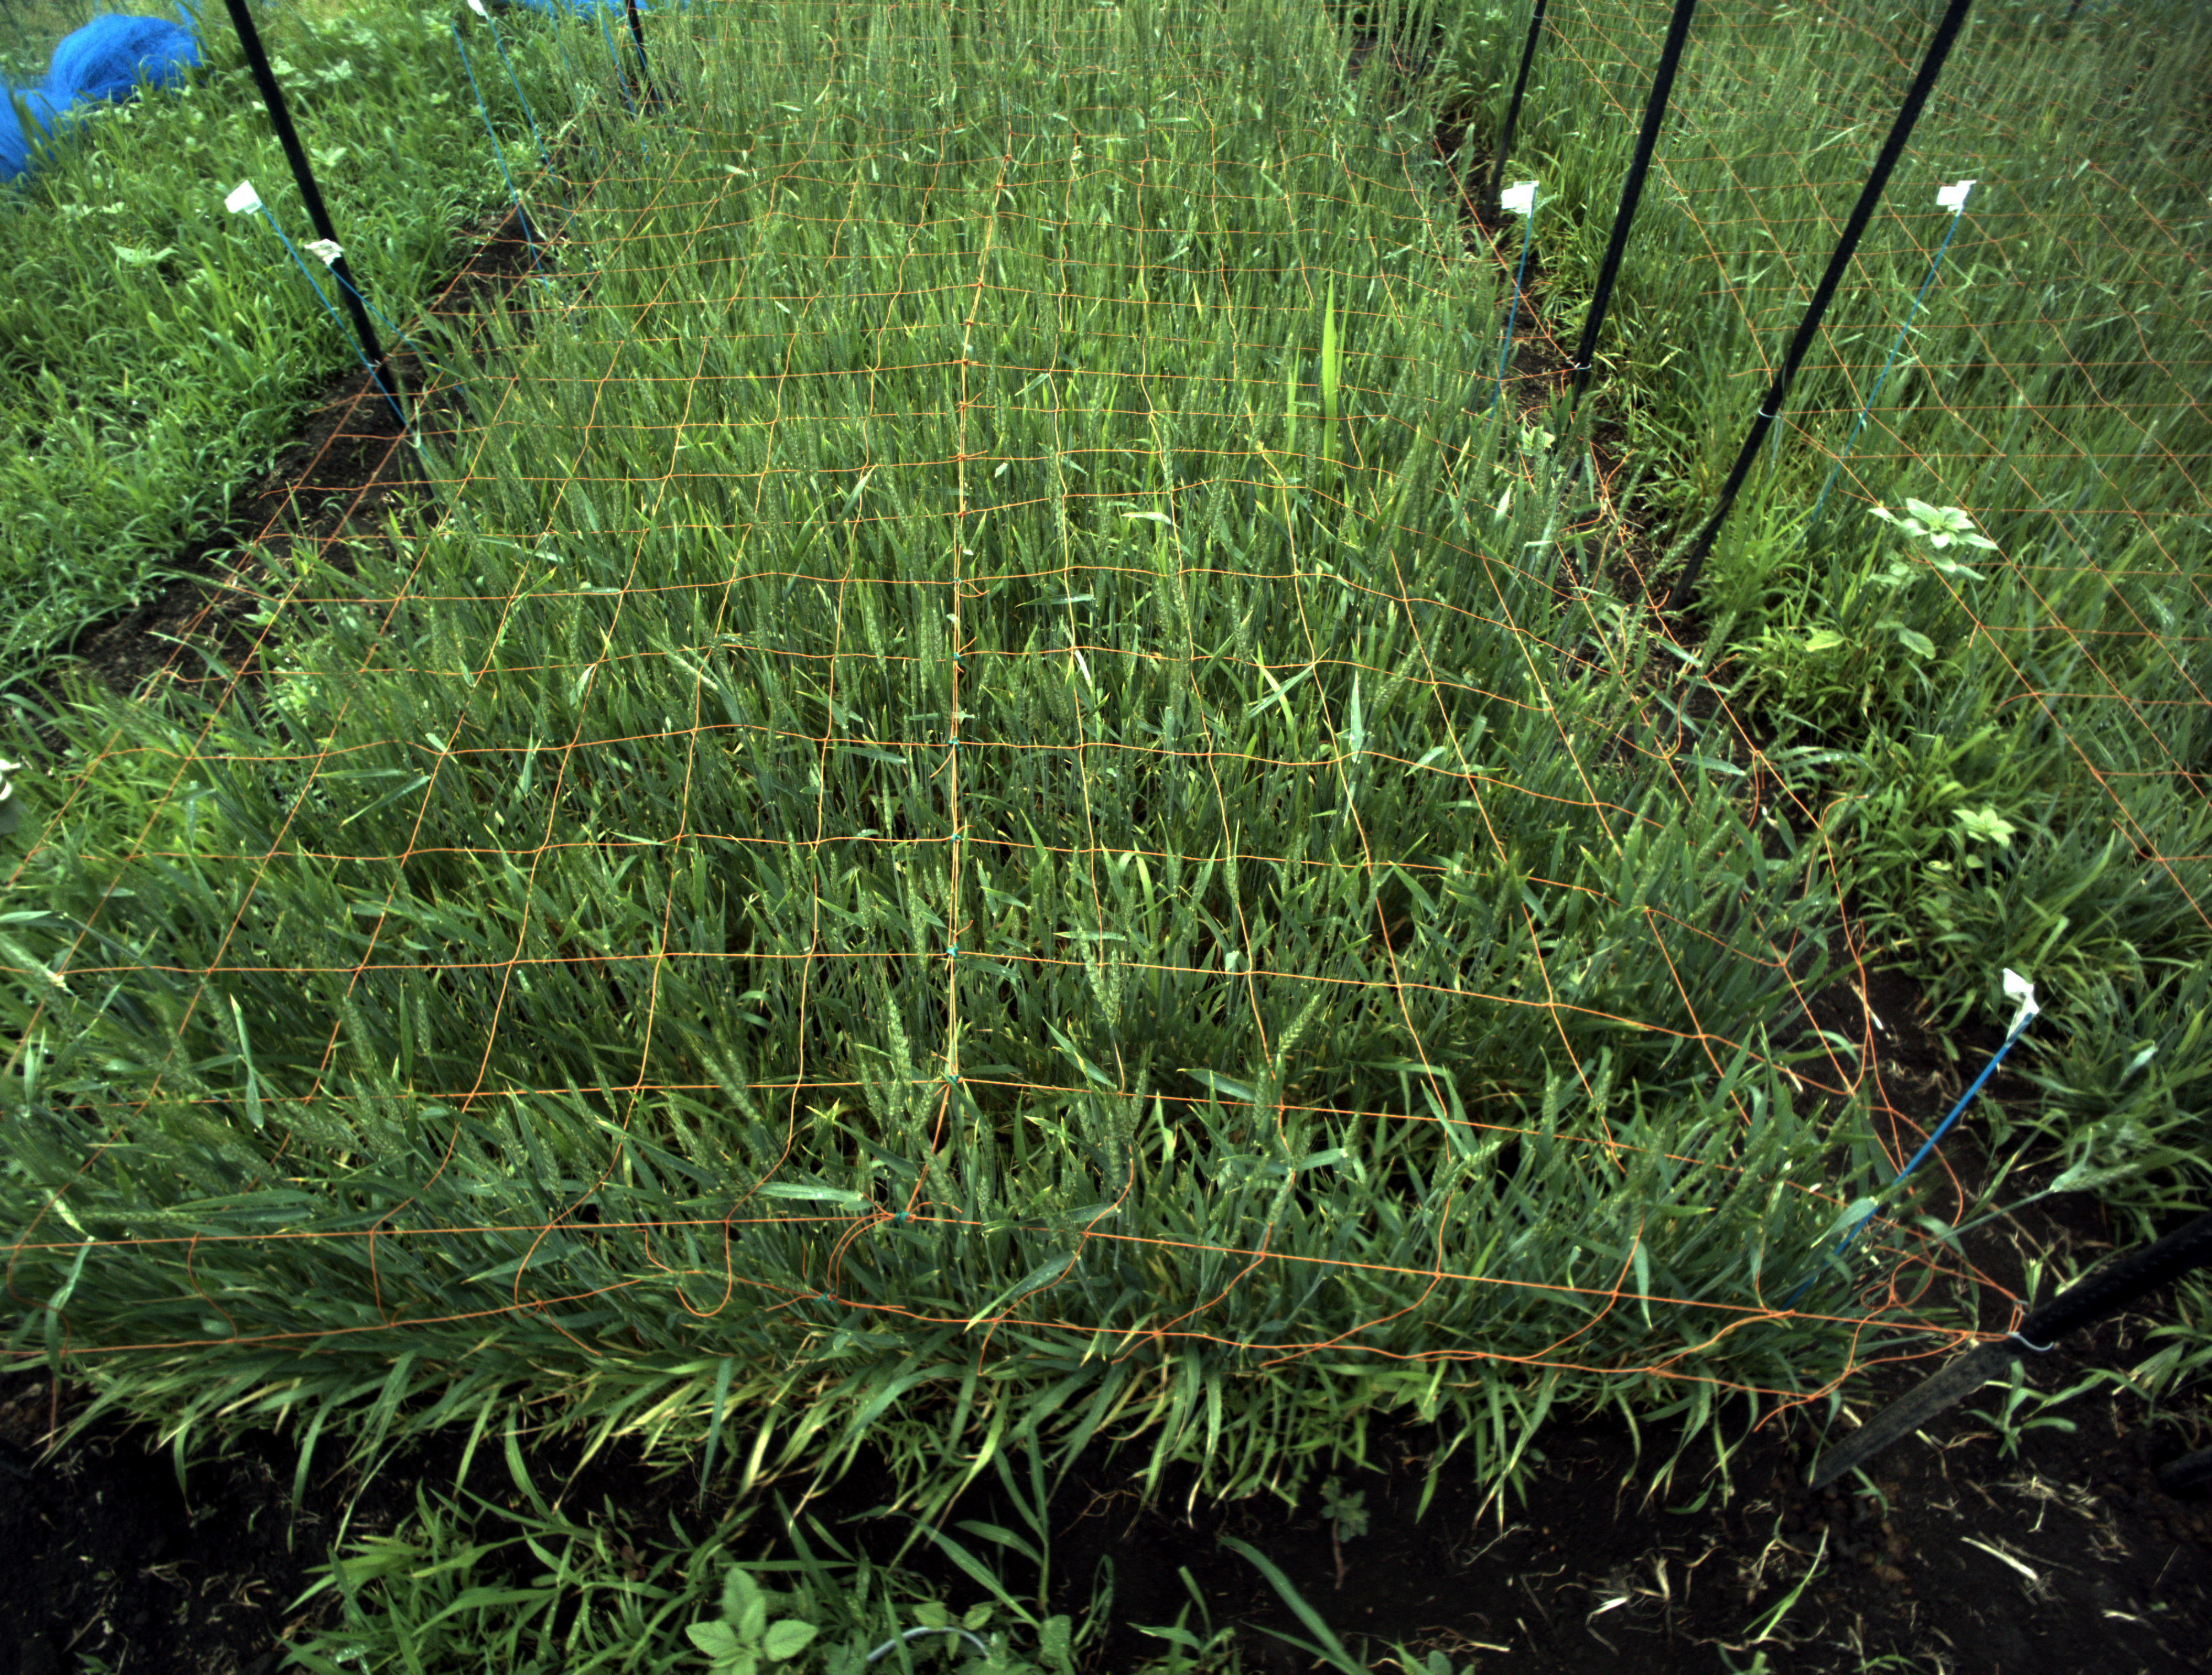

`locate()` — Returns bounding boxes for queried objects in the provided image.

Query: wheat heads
[602,410,612,446]
[1230,594,1251,663]
[1623,788,1654,850]
[1786,1123,1811,1155]
[1337,53,1349,86]
[983,1125,998,1155]
[577,656,590,687]
[1120,894,1126,916]
[860,890,870,930]
[1179,185,1184,216]
[1239,217,1251,254]
[562,656,576,687]
[697,478,704,501]
[939,28,947,64]
[391,698,415,740]
[977,66,994,114]
[681,865,695,907]
[818,332,830,372]
[776,531,785,563]
[342,993,379,1069]
[892,7,898,32]
[829,295,838,335]
[1365,2,1374,37]
[1028,434,1037,483]
[825,133,832,160]
[833,160,844,182]
[779,864,795,909]
[1267,1172,1295,1225]
[1275,639,1281,658]
[1971,48,1987,80]
[904,64,914,98]
[1234,417,1245,460]
[1048,443,1056,512]
[526,431,548,463]
[809,37,816,71]
[784,1267,805,1286]
[1087,747,1096,773]
[1768,840,1814,885]
[1377,15,1385,52]
[905,21,912,48]
[310,646,377,720]
[1418,516,1434,566]
[1156,521,1166,551]
[289,532,311,555]
[920,2,928,45]
[1401,386,1415,422]
[1029,640,1041,679]
[742,693,757,734]
[1019,1,1024,31]
[683,336,695,364]
[693,272,705,295]
[922,409,931,445]
[1153,578,1171,646]
[998,391,1007,432]
[1488,421,1504,465]
[854,1171,866,1194]
[894,551,902,586]
[1083,283,1093,316]
[540,686,552,724]
[1087,890,1102,924]
[768,89,778,121]
[496,563,511,585]
[1873,138,1882,161]
[198,974,240,1043]
[878,48,885,87]
[1186,210,1194,237]
[1226,1228,1241,1251]
[1467,749,1479,770]
[964,226,970,253]
[924,463,933,485]
[1058,233,1065,260]
[1251,546,1259,573]
[1951,31,1964,62]
[993,391,1000,429]
[927,441,936,463]
[1233,619,1252,665]
[795,678,804,721]
[924,1179,944,1214]
[1699,850,1734,889]
[1315,500,1321,520]
[568,486,579,530]
[1027,697,1035,739]
[612,482,622,536]
[218,1143,276,1179]
[1128,185,1138,209]
[875,148,889,179]
[352,1078,379,1123]
[699,618,729,661]
[284,1099,365,1155]
[1179,635,1190,690]
[909,661,918,708]
[1894,1188,1930,1215]
[671,10,681,35]
[493,721,507,745]
[592,487,606,542]
[1297,32,1307,57]
[1383,2,1393,56]
[1264,358,1276,371]
[636,576,659,612]
[1232,383,1251,426]
[1277,994,1320,1054]
[1419,23,1432,59]
[1038,353,1047,370]
[880,782,894,834]
[778,75,784,98]
[1126,1068,1148,1136]
[1103,946,1124,1030]
[1258,516,1269,557]
[711,75,718,121]
[373,1079,406,1134]
[1076,924,1107,1008]
[1060,1210,1082,1253]
[826,762,834,791]
[1686,882,1729,921]
[720,197,737,229]
[1179,1,1183,24]
[666,39,677,69]
[1040,6,1047,34]
[760,78,770,110]
[975,331,985,370]
[772,221,785,237]
[649,862,663,891]
[882,325,888,350]
[816,249,826,277]
[792,425,801,456]
[905,191,913,213]
[992,200,999,225]
[667,272,683,301]
[842,16,851,55]
[590,925,605,941]
[522,191,541,227]
[1407,267,1415,301]
[1284,2,1289,16]
[764,230,777,260]
[935,864,958,917]
[97,686,171,740]
[1388,223,1396,250]
[1440,862,1455,907]
[907,162,915,197]
[1373,210,1381,236]
[1416,97,1427,134]
[1015,319,1025,362]
[1377,785,1398,830]
[597,24,614,62]
[1261,8,1272,53]
[110,1107,187,1155]
[193,1115,240,1143]
[841,273,850,320]
[1428,620,1444,661]
[1116,52,1129,87]
[663,43,674,71]
[1346,264,1353,290]
[762,299,777,341]
[1128,132,1146,167]
[954,327,973,362]
[1377,83,1386,101]
[1070,843,1080,888]
[928,622,938,671]
[1404,16,1416,58]
[947,323,956,349]
[218,827,236,865]
[1536,527,1563,586]
[1280,853,1292,896]
[443,902,460,922]
[1214,225,1223,256]
[1235,365,1244,381]
[1389,448,1414,497]
[1034,271,1046,314]
[1441,331,1453,361]
[1630,1197,1644,1240]
[591,881,626,925]
[491,455,539,513]
[1373,271,1385,299]
[1502,519,1520,559]
[1465,1140,1502,1170]
[1199,354,1216,415]
[1481,273,1492,326]
[1773,58,1788,91]
[671,30,683,72]
[1135,536,1143,565]
[1084,861,1091,880]
[1646,814,1677,872]
[1191,704,1202,734]
[1736,1153,1765,1193]
[920,521,926,544]
[590,557,604,584]
[1714,610,1737,655]
[1130,343,1137,372]
[765,159,775,192]
[450,334,475,380]
[875,4,883,46]
[1233,316,1247,353]
[982,547,989,585]
[866,287,879,307]
[1718,1194,1737,1222]
[901,713,910,756]
[1599,681,1614,713]
[1184,75,1194,111]
[417,353,447,399]
[1124,319,1129,342]
[678,336,688,373]
[1150,6,1159,28]
[676,255,696,295]
[1318,1241,1329,1265]
[630,1117,651,1142]
[985,348,997,406]
[1491,301,1507,339]
[1270,541,1282,579]
[1838,1161,1874,1185]
[1342,1146,1358,1177]
[1141,24,1148,61]
[1097,246,1102,268]
[1047,20,1053,54]
[745,294,757,342]
[1346,127,1353,160]
[384,921,406,944]
[813,1114,820,1137]
[1326,859,1339,901]
[2029,56,2050,95]
[166,685,201,729]
[1541,1074,1561,1120]
[733,553,744,588]
[175,569,229,589]
[609,549,621,586]
[1217,311,1226,348]
[871,335,877,364]
[671,853,685,905]
[2140,421,2159,448]
[1357,270,1369,294]
[851,436,860,467]
[578,932,616,962]
[917,288,926,310]
[781,549,799,566]
[1092,174,1099,199]
[688,717,713,760]
[126,1042,214,1099]
[530,314,542,342]
[558,383,575,426]
[1030,767,1037,786]
[1408,706,1423,742]
[1162,314,1169,345]
[1182,153,1192,185]
[1120,451,1127,480]
[887,483,916,543]
[966,8,972,33]
[1184,1,1191,12]
[561,672,573,712]
[1004,1169,1022,1211]
[1094,450,1099,473]
[591,1060,618,1116]
[1015,36,1021,58]
[1856,95,1869,122]
[1328,24,1338,58]
[1076,1100,1100,1149]
[1180,923,1193,952]
[672,654,719,693]
[701,1056,765,1126]
[786,830,800,886]
[766,716,777,769]
[1080,314,1088,345]
[793,892,816,928]
[1121,634,1131,683]
[1200,23,1206,64]
[1005,1,1015,20]
[710,1208,737,1229]
[1233,35,1246,73]
[899,226,906,253]
[1163,423,1174,496]
[644,136,664,167]
[682,527,693,561]
[1441,1154,1458,1181]
[1183,31,1187,52]
[1693,792,1710,836]
[1177,394,1188,428]
[769,71,778,90]
[495,1117,529,1167]
[1073,240,1079,265]
[561,1120,611,1170]
[442,686,458,719]
[756,163,766,192]
[780,1279,810,1293]
[1348,676,1363,727]
[1108,746,1118,772]
[833,743,844,775]
[1000,219,1008,238]
[271,893,314,928]
[627,330,641,358]
[506,884,519,910]
[1015,771,1022,801]
[1359,675,1375,710]
[1203,474,1222,535]
[801,20,810,74]
[618,185,629,216]
[355,857,372,880]
[1381,361,1412,436]
[482,916,501,957]
[1311,41,1319,78]
[936,683,956,728]
[1104,451,1111,470]
[1066,93,1075,129]
[882,172,892,192]
[1578,738,1603,767]
[408,904,433,936]
[1370,957,1386,987]
[1073,532,1096,569]
[920,615,930,696]
[1674,1159,1716,1192]
[1406,791,1418,817]
[1266,736,1274,766]
[740,445,748,473]
[849,64,853,90]
[1104,12,1115,48]
[1065,152,1072,176]
[799,344,806,362]
[715,342,726,369]
[495,470,515,521]
[718,660,743,708]
[910,1082,936,1131]
[1084,70,1097,126]
[995,900,1005,920]
[959,747,965,776]
[731,484,771,547]
[563,76,575,112]
[4,943,83,1040]
[1425,450,1441,505]
[841,429,852,459]
[682,33,687,65]
[1239,200,1248,231]
[751,437,764,468]
[1038,1113,1051,1141]
[987,307,995,344]
[1311,869,1327,909]
[1679,65,1690,101]
[1442,374,1457,431]
[1144,201,1149,229]
[1054,478,1066,549]
[1189,215,1200,246]
[1032,528,1042,573]
[1747,738,1783,772]
[295,884,323,919]
[965,49,976,106]
[1251,1069,1271,1132]
[1656,515,1711,573]
[384,521,409,560]
[1373,518,1399,566]
[1112,180,1119,219]
[1240,1096,1252,1136]
[1367,317,1393,386]
[1795,146,1811,180]
[454,1124,489,1173]
[164,1025,196,1065]
[1050,673,1074,726]
[1168,283,1179,325]
[527,887,544,913]
[1114,261,1125,303]
[540,1135,565,1203]
[1187,319,1195,350]
[1437,299,1445,324]
[2085,254,2092,271]
[1451,15,1465,52]
[761,891,778,931]
[1516,513,1532,559]
[824,215,832,243]
[1040,1207,1064,1246]
[1004,434,1012,463]
[1105,881,1115,904]
[1619,463,1646,515]
[1074,340,1080,359]
[451,610,466,652]
[1486,338,1495,376]
[1259,303,1268,343]
[1407,669,1421,707]
[1278,332,1296,393]
[1145,333,1152,370]
[1291,218,1301,250]
[1724,663,1756,700]
[1339,10,1352,54]
[173,1149,233,1194]
[1354,79,1369,118]
[1626,596,1645,651]
[1298,682,1304,701]
[1136,321,1148,364]
[1142,529,1148,563]
[414,994,435,1056]
[1624,1154,1640,1184]
[1290,109,1299,146]
[1212,488,1228,544]
[976,1175,990,1213]
[1284,541,1298,573]
[860,1061,884,1122]
[808,247,832,302]
[635,1240,658,1265]
[866,603,888,674]
[1725,254,1736,278]
[421,702,435,730]
[962,906,971,945]
[1111,424,1117,440]
[2041,237,2054,270]
[898,1118,923,1151]
[1447,732,1467,765]
[870,707,879,739]
[1965,10,1976,47]
[878,525,885,565]
[574,1148,594,1191]
[1324,230,1341,265]
[601,117,622,150]
[767,480,778,542]
[1123,343,1129,376]
[647,63,667,99]
[1025,533,1036,573]
[930,573,938,609]
[1476,453,1491,509]
[780,421,813,481]
[606,16,624,62]
[575,33,592,72]
[866,92,878,144]
[1590,1127,1611,1144]
[1438,223,1452,258]
[2039,83,2056,117]
[851,661,863,706]
[642,265,656,288]
[577,111,588,137]
[1036,698,1046,735]
[1127,753,1137,784]
[1071,296,1077,320]
[975,438,984,466]
[1421,221,1427,255]
[827,336,839,367]
[996,309,1004,339]
[1271,95,1279,151]
[901,401,909,437]
[857,174,872,210]
[665,582,690,620]
[550,422,566,463]
[1010,78,1017,107]
[1135,703,1145,747]
[731,1156,755,1191]
[1013,672,1025,720]
[914,521,928,574]
[1266,229,1277,263]
[1073,1,1078,16]
[1079,32,1087,68]
[1468,1197,1479,1223]
[1080,115,1093,150]
[1075,17,1085,35]
[764,270,771,292]
[1281,433,1289,468]
[584,36,600,72]
[621,419,641,453]
[778,514,792,540]
[1101,211,1107,232]
[1402,427,1412,451]
[787,910,800,943]
[1275,498,1284,516]
[1744,1117,1776,1158]
[679,1123,709,1168]
[906,877,922,931]
[1154,185,1167,216]
[647,876,662,915]
[765,432,773,451]
[398,376,412,424]
[656,163,673,199]
[778,17,796,59]
[1030,893,1038,915]
[1269,16,1279,61]
[724,1046,751,1099]
[1368,859,1380,892]
[1827,1092,1860,1139]
[653,659,669,703]
[474,548,496,597]
[1240,61,1252,97]
[863,411,875,446]
[933,1,946,27]
[1559,937,1576,966]
[1038,318,1047,351]
[513,615,523,639]
[431,884,448,914]
[1349,269,1358,310]
[1425,257,1441,296]
[1434,359,1444,397]
[685,38,698,77]
[466,687,491,725]
[567,871,583,904]
[1033,248,1038,272]
[1419,453,1430,512]
[1022,424,1032,478]
[834,658,846,689]
[1260,97,1273,142]
[865,45,872,78]
[630,645,651,689]
[566,1075,601,1130]
[929,1230,942,1251]
[597,667,620,708]
[1130,702,1140,740]
[999,263,1008,285]
[609,65,619,102]
[1060,1166,1069,1194]
[1236,703,1249,740]
[1353,468,1362,494]
[885,994,915,1089]
[46,1187,80,1230]
[976,654,996,702]
[1424,542,1443,581]
[467,877,486,910]
[955,250,964,293]
[607,502,615,526]
[937,188,946,214]
[266,1112,306,1139]
[1168,680,1181,719]
[1525,1226,1544,1244]
[1193,538,1200,569]
[1168,127,1179,172]
[747,1195,765,1229]
[1022,218,1031,234]
[815,13,822,41]
[716,293,726,341]
[793,3,803,52]
[1041,71,1049,99]
[917,64,924,99]
[1325,916,1337,948]
[1015,660,1023,678]
[1028,864,1036,892]
[627,47,637,69]
[953,510,968,550]
[1686,791,1701,829]
[1231,284,1241,331]
[1190,865,1204,909]
[1144,22,1156,60]
[1006,304,1016,322]
[821,926,835,952]
[632,368,661,417]
[1871,1173,1921,1204]
[430,688,444,726]
[1114,537,1127,578]
[473,295,508,347]
[493,293,517,340]
[1249,919,1261,947]
[1372,677,1397,711]
[946,87,954,122]
[1116,12,1129,52]
[799,314,810,348]
[1532,428,1547,497]
[1113,1101,1130,1147]
[443,490,474,539]
[683,78,693,96]
[1024,325,1034,368]
[466,354,485,380]
[1153,335,1162,370]
[886,191,894,208]
[686,13,693,51]
[889,33,897,61]
[942,328,952,362]
[891,331,901,368]
[719,49,729,71]
[1267,294,1278,345]
[1376,215,1391,247]
[1106,301,1113,342]
[568,1157,601,1181]
[1559,411,1581,459]
[772,179,784,211]
[749,537,759,570]
[1114,341,1122,377]
[1379,478,1392,511]
[1243,1,1256,46]
[805,413,820,479]
[943,295,953,325]
[858,1146,876,1188]
[850,63,856,86]
[1442,874,1462,912]
[1418,109,1430,149]
[820,3,828,35]
[1588,1071,1612,1113]
[1047,0,1054,18]
[1149,751,1156,771]
[1351,331,1359,361]
[1305,425,1317,494]
[1426,1,1434,27]
[552,515,567,552]
[1542,473,1563,524]
[1334,250,1341,273]
[1228,388,1238,414]
[727,56,736,83]
[767,1142,782,1165]
[1252,191,1266,225]
[1096,1234,1108,1254]
[661,631,678,655]
[1638,1126,1666,1178]
[798,756,811,788]
[1248,1151,1271,1182]
[605,316,618,356]
[971,424,978,446]
[1029,71,1037,114]
[395,653,424,719]
[51,1166,105,1193]
[933,254,939,274]
[773,668,788,720]
[882,5,889,52]
[1310,731,1320,751]
[1090,318,1098,344]
[1411,9,1426,55]
[1441,370,1450,403]
[1356,208,1364,239]
[1204,170,1211,188]
[594,351,612,393]
[1123,886,1136,924]
[1130,7,1143,44]
[922,864,936,907]
[1255,541,1270,581]
[817,539,827,584]
[1342,1196,1357,1228]
[1692,915,1712,941]
[997,699,1019,743]
[1404,309,1424,356]
[764,33,771,53]
[664,698,685,726]
[842,680,850,729]
[1694,820,1730,865]
[1298,428,1305,466]
[1283,285,1292,306]
[1536,1149,1566,1183]
[812,742,823,773]
[2008,59,2034,97]
[849,226,859,287]
[844,562,855,598]
[1492,877,1513,924]
[932,609,944,660]
[1276,199,1286,228]
[1592,1186,1631,1213]
[746,263,756,290]
[1565,606,1585,641]
[1265,388,1282,433]
[1359,770,1376,805]
[1340,493,1356,539]
[553,319,567,376]
[873,1062,895,1099]
[868,889,878,935]
[553,891,571,924]
[834,882,844,926]
[705,1268,741,1286]
[802,587,809,613]
[581,851,609,888]
[899,5,907,35]
[1097,497,1105,532]
[599,181,606,202]
[1137,1,1144,25]
[1291,1125,1313,1168]
[357,1118,404,1161]
[966,425,973,475]
[1811,252,1821,286]
[1003,189,1019,214]
[1290,832,1304,883]
[1376,512,1391,553]
[1611,680,1633,725]
[1051,182,1058,202]
[697,1115,718,1156]
[718,568,728,589]
[1321,35,1328,67]
[1745,261,1754,291]
[1102,1104,1119,1183]
[1092,10,1102,57]
[1205,24,1215,51]
[863,981,872,1000]
[746,429,754,473]
[930,329,938,363]
[612,185,622,210]
[1463,444,1488,509]
[511,682,540,736]
[1342,1112,1359,1150]
[984,0,995,18]
[812,554,821,581]
[937,68,947,97]
[1228,537,1234,551]
[829,260,842,282]
[1710,725,1729,758]
[905,406,915,434]
[1362,463,1372,517]
[710,385,716,419]
[1086,203,1096,229]
[560,66,579,107]
[1080,206,1088,231]
[1318,369,1325,407]
[139,876,165,909]
[580,717,610,756]
[444,678,479,726]
[1777,1163,1805,1181]
[691,246,697,271]
[1350,406,1359,444]
[667,1090,688,1153]
[944,389,961,439]
[221,664,258,711]
[503,680,525,723]
[1396,11,1414,52]
[486,424,519,474]
[964,137,971,160]
[822,165,831,176]
[1057,1,1063,28]
[1346,876,1358,902]
[783,2,798,43]
[1169,208,1178,243]
[1575,689,1601,720]
[642,692,655,728]
[1035,21,1041,40]
[1429,48,1445,85]
[1469,864,1481,891]
[1312,292,1324,349]
[658,531,672,564]
[124,723,157,748]
[869,211,882,251]
[553,76,567,101]
[1472,306,1481,332]
[1456,416,1466,452]
[121,873,155,909]
[1815,791,1854,847]
[1302,950,1319,984]
[1096,499,1112,557]
[846,373,858,430]
[1334,330,1343,352]
[786,249,806,280]
[1431,1144,1448,1193]
[1041,879,1053,924]
[1381,643,1422,706]
[1259,288,1266,309]
[634,269,651,300]
[1121,150,1131,184]
[1506,400,1516,442]
[773,1123,784,1145]
[1208,1202,1224,1217]
[874,575,881,612]
[890,523,897,540]
[825,1167,841,1187]
[1027,920,1035,952]
[429,604,446,672]
[931,78,939,103]
[718,531,734,560]
[807,224,821,252]
[79,1074,119,1134]
[1151,316,1161,350]
[870,13,876,40]
[527,894,548,934]
[1049,322,1055,364]
[1063,0,1069,27]
[970,236,979,266]
[1280,740,1295,768]
[1582,402,1593,452]
[639,79,645,93]
[941,246,948,270]
[661,53,671,83]
[920,1147,956,1207]
[1255,23,1265,61]
[1409,488,1422,537]
[1264,195,1277,228]
[887,1078,902,1118]
[1025,10,1031,41]
[752,247,768,274]
[1088,377,1104,442]
[513,1193,543,1236]
[1046,300,1054,323]
[745,336,752,362]
[569,601,583,667]
[337,650,388,718]
[361,617,393,658]
[725,79,742,113]
[620,249,628,286]
[559,119,576,140]
[1416,353,1428,425]
[757,44,765,70]
[1098,268,1107,299]
[922,367,934,393]
[1323,57,1334,91]
[493,577,507,597]
[1533,491,1544,544]
[1177,1170,1191,1199]
[816,300,825,325]
[597,136,606,152]
[1168,555,1189,633]
[1376,663,1387,692]
[1700,619,1724,673]
[517,923,546,958]
[573,483,592,532]
[1287,587,1295,619]
[1398,466,1422,519]
[1283,11,1298,47]
[1167,69,1178,96]
[1407,0,1420,17]
[845,326,853,366]
[1403,78,1410,105]
[1358,888,1375,922]
[769,569,778,613]
[808,329,814,357]
[596,242,609,277]
[1200,289,1211,342]
[1223,851,1240,905]
[1123,1,1131,31]
[751,57,763,89]
[1315,204,1323,238]
[78,1211,196,1229]
[740,1133,765,1162]
[710,930,720,952]
[990,79,1002,118]
[1195,160,1202,186]
[1011,912,1021,941]
[1014,254,1021,271]
[601,181,610,205]
[1054,54,1065,87]
[426,435,451,481]
[1227,737,1241,777]
[1149,29,1159,47]
[1459,927,1479,956]
[1006,249,1015,278]
[529,371,552,418]
[1295,282,1306,307]
[442,633,459,667]
[2097,22,2127,77]
[1021,69,1031,105]
[687,683,699,723]
[829,850,839,896]
[564,738,576,773]
[96,704,125,726]
[1213,1151,1229,1175]
[1285,45,1294,75]
[1395,548,1412,576]
[1386,1,1398,59]
[972,3,981,36]
[933,414,945,451]
[1545,895,1568,926]
[1630,864,1656,908]
[915,923,930,974]
[1372,68,1379,99]
[698,17,711,50]
[735,55,743,97]
[755,603,768,657]
[712,1160,738,1198]
[812,307,820,320]
[1042,674,1058,717]
[2116,44,2140,89]
[1248,402,1267,454]
[1800,70,1819,112]
[688,96,701,123]
[881,438,896,484]
[1736,229,1751,258]
[1441,1172,1459,1197]
[1417,567,1426,601]
[1171,853,1182,896]
[789,244,802,293]
[1850,66,1862,89]
[1023,256,1030,284]
[1201,130,1212,153]
[924,333,931,364]
[570,718,583,739]
[1151,910,1163,942]
[652,35,661,59]
[387,852,410,894]
[1375,359,1386,386]
[1827,65,1843,99]
[571,359,586,423]
[1007,14,1018,46]
[1093,570,1106,612]
[1794,25,1810,62]
[456,500,478,540]
[1781,905,1827,931]
[911,543,918,582]
[1189,394,1198,448]
[1142,748,1149,768]
[857,70,862,91]
[1203,425,1215,475]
